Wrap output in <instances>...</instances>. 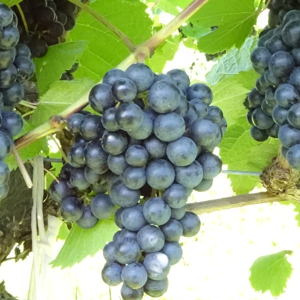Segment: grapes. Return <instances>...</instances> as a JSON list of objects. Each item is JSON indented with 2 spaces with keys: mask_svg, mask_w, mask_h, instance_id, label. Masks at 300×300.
Segmentation results:
<instances>
[{
  "mask_svg": "<svg viewBox=\"0 0 300 300\" xmlns=\"http://www.w3.org/2000/svg\"><path fill=\"white\" fill-rule=\"evenodd\" d=\"M212 101L211 89L190 85L182 70L157 75L135 63L108 70L90 92L100 115L81 109L68 118L74 139L50 194L62 217L83 228L115 211L120 230L103 249L101 277L110 286L123 282V300L163 296L183 256L178 241L201 228L184 205L222 169L212 150L227 122Z\"/></svg>",
  "mask_w": 300,
  "mask_h": 300,
  "instance_id": "obj_1",
  "label": "grapes"
},
{
  "mask_svg": "<svg viewBox=\"0 0 300 300\" xmlns=\"http://www.w3.org/2000/svg\"><path fill=\"white\" fill-rule=\"evenodd\" d=\"M274 22L262 29L250 55L260 74L245 98L250 134L278 138L281 154L300 169V0H267Z\"/></svg>",
  "mask_w": 300,
  "mask_h": 300,
  "instance_id": "obj_2",
  "label": "grapes"
},
{
  "mask_svg": "<svg viewBox=\"0 0 300 300\" xmlns=\"http://www.w3.org/2000/svg\"><path fill=\"white\" fill-rule=\"evenodd\" d=\"M78 8L66 0H22L11 8L0 4V199L10 193L4 181L11 174L4 161L14 146L12 136L23 128L22 115L10 109L25 94L23 84L35 73L30 59L41 58L64 31L75 25Z\"/></svg>",
  "mask_w": 300,
  "mask_h": 300,
  "instance_id": "obj_3",
  "label": "grapes"
}]
</instances>
